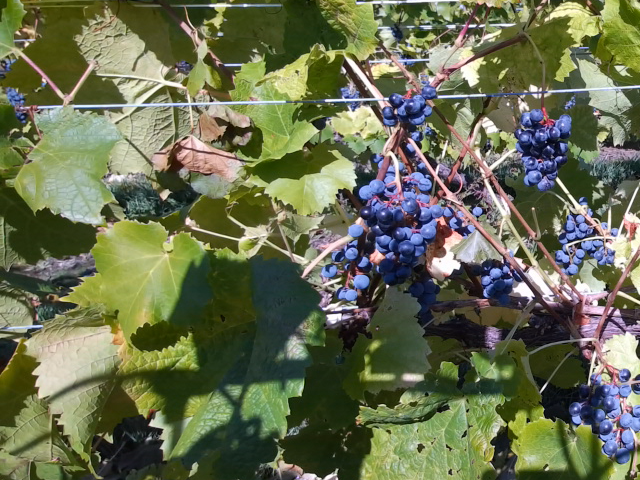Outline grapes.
<instances>
[{"instance_id": "1", "label": "grapes", "mask_w": 640, "mask_h": 480, "mask_svg": "<svg viewBox=\"0 0 640 480\" xmlns=\"http://www.w3.org/2000/svg\"><path fill=\"white\" fill-rule=\"evenodd\" d=\"M396 180L395 168L389 165L386 176L383 180L371 179L369 185L359 188L358 196L363 201H371L370 205L362 206L359 209V216L365 220L367 226L372 227V232L367 234V239L373 241L374 247L382 254L386 255L381 263L376 266L378 274H384V282L389 286L403 284L407 277L413 272V263L419 259L426 251V240L433 241L437 233L438 221L436 219L451 218L448 226L451 230H460L462 239L467 240L468 234L475 232L473 225L462 226L460 217L464 216L461 211L456 212L452 207L441 205L419 206L420 203L428 204L431 201L429 194L418 193L419 191H429L433 187V182L422 172H415L410 175L411 181H406L402 185V200L400 207H386L377 194L384 197H393L397 193V185L390 182ZM404 211L408 216H413V220L422 225L419 233H416L410 224L404 222Z\"/></svg>"}, {"instance_id": "6", "label": "grapes", "mask_w": 640, "mask_h": 480, "mask_svg": "<svg viewBox=\"0 0 640 480\" xmlns=\"http://www.w3.org/2000/svg\"><path fill=\"white\" fill-rule=\"evenodd\" d=\"M482 268L489 272L479 279L483 286V296L488 299L498 298L501 304H507L511 300L509 293L514 288L513 280L522 281L519 274L510 268L508 261H505L502 267H496L492 260H486Z\"/></svg>"}, {"instance_id": "4", "label": "grapes", "mask_w": 640, "mask_h": 480, "mask_svg": "<svg viewBox=\"0 0 640 480\" xmlns=\"http://www.w3.org/2000/svg\"><path fill=\"white\" fill-rule=\"evenodd\" d=\"M566 233L559 235V243L562 245V251H556L554 258L558 265H564L562 270L566 275H577L579 268L577 265L582 263L585 251L590 257H594L598 265L613 264L615 262V252L608 247H603L602 241L586 240L580 244V248L574 251L573 263L568 254H566L565 246L568 240L575 238L584 239L593 233V227L585 222L583 215L569 214L567 222L564 224Z\"/></svg>"}, {"instance_id": "8", "label": "grapes", "mask_w": 640, "mask_h": 480, "mask_svg": "<svg viewBox=\"0 0 640 480\" xmlns=\"http://www.w3.org/2000/svg\"><path fill=\"white\" fill-rule=\"evenodd\" d=\"M352 283L355 289H367L370 286V278L365 274H355L352 277ZM355 289L340 287L336 292V298L339 301H356L358 293Z\"/></svg>"}, {"instance_id": "3", "label": "grapes", "mask_w": 640, "mask_h": 480, "mask_svg": "<svg viewBox=\"0 0 640 480\" xmlns=\"http://www.w3.org/2000/svg\"><path fill=\"white\" fill-rule=\"evenodd\" d=\"M589 381L597 386L595 393L590 396V400L585 398L591 394V388L582 384L579 387L581 396L579 401H573L569 406V414L572 416V422L576 425H594L598 424L599 439L605 442L602 445V452L606 457L616 455V461L619 465H625L630 460V452L634 450L635 434L640 432V404L633 407V414L623 412L619 416V426L625 431L620 436V441L624 443V447L617 448L618 443L615 441L616 433L613 430V422L609 419L617 417L621 413V400L631 395V387L629 385H600L602 376L600 374H592Z\"/></svg>"}, {"instance_id": "5", "label": "grapes", "mask_w": 640, "mask_h": 480, "mask_svg": "<svg viewBox=\"0 0 640 480\" xmlns=\"http://www.w3.org/2000/svg\"><path fill=\"white\" fill-rule=\"evenodd\" d=\"M436 97V89L433 85L424 86L421 89V95H415L412 99H405L402 94L392 93L389 96L390 104L397 108V116L393 112L391 106L382 109L383 125L390 127L396 125L398 120L411 123L412 125H421L426 119L432 115V107L426 104V99H434Z\"/></svg>"}, {"instance_id": "7", "label": "grapes", "mask_w": 640, "mask_h": 480, "mask_svg": "<svg viewBox=\"0 0 640 480\" xmlns=\"http://www.w3.org/2000/svg\"><path fill=\"white\" fill-rule=\"evenodd\" d=\"M360 251V241L358 239H353L349 244L344 246L341 249H335L331 254V259L334 262H341L345 258L349 261H355L357 266L363 271H372L374 269V264L370 261V258L367 255H359Z\"/></svg>"}, {"instance_id": "2", "label": "grapes", "mask_w": 640, "mask_h": 480, "mask_svg": "<svg viewBox=\"0 0 640 480\" xmlns=\"http://www.w3.org/2000/svg\"><path fill=\"white\" fill-rule=\"evenodd\" d=\"M544 118L541 108L524 112L519 123L526 128L518 129L514 136L515 149L521 152V160L525 167L524 183L545 193L556 186V178L560 174L559 166L568 161V143L565 139L572 136V116L568 112L561 113L557 120L546 126L536 121Z\"/></svg>"}]
</instances>
